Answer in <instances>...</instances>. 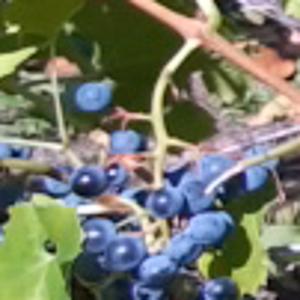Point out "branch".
<instances>
[{
    "label": "branch",
    "instance_id": "30e6481e",
    "mask_svg": "<svg viewBox=\"0 0 300 300\" xmlns=\"http://www.w3.org/2000/svg\"><path fill=\"white\" fill-rule=\"evenodd\" d=\"M129 4L144 14L171 24L185 42L209 47L217 53L228 56L234 62L248 69L272 89L278 91L297 105H300L299 91L277 78L250 56L238 51L230 45V42L224 35L219 34L198 18L182 14L160 1L129 0Z\"/></svg>",
    "mask_w": 300,
    "mask_h": 300
}]
</instances>
